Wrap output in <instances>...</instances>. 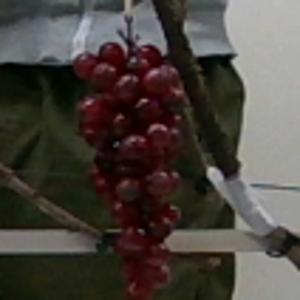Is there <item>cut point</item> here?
Wrapping results in <instances>:
<instances>
[{"label":"cut point","instance_id":"6a23745f","mask_svg":"<svg viewBox=\"0 0 300 300\" xmlns=\"http://www.w3.org/2000/svg\"><path fill=\"white\" fill-rule=\"evenodd\" d=\"M134 0H124V15L123 23L126 25L127 30V50L126 56L134 54V42H133V27H134Z\"/></svg>","mask_w":300,"mask_h":300}]
</instances>
